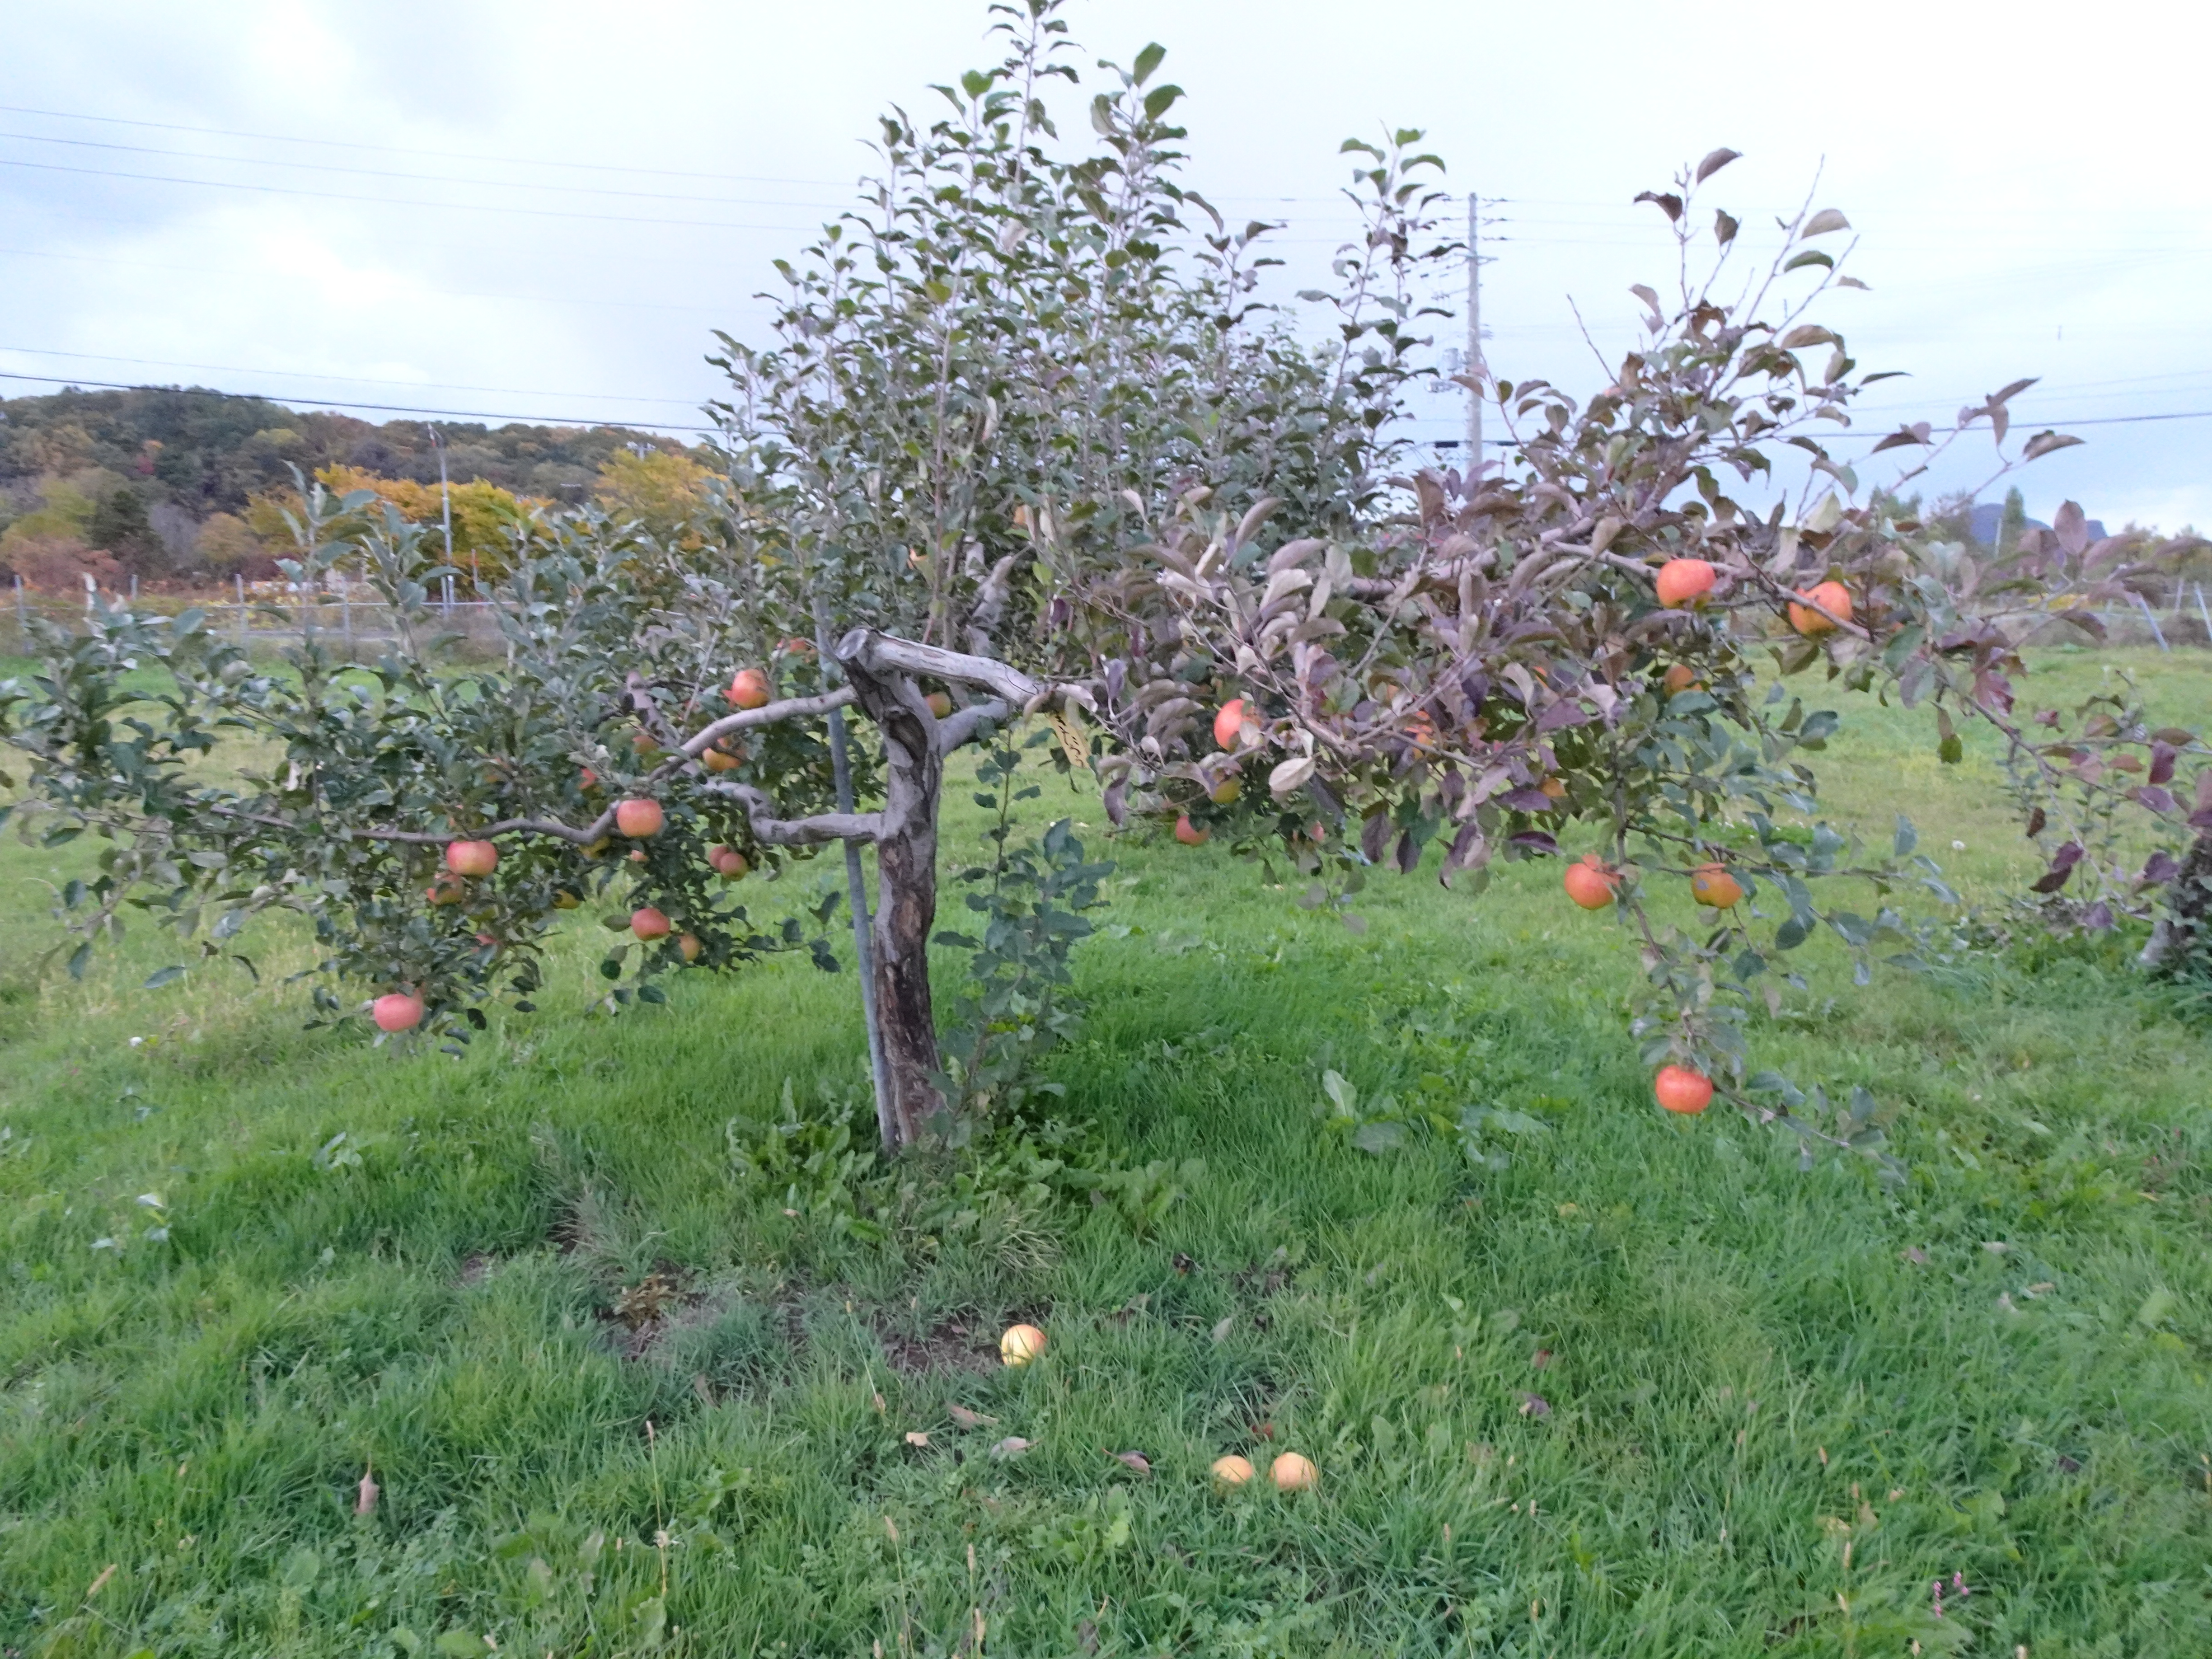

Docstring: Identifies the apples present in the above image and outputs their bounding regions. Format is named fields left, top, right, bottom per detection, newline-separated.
left=623, top=733, right=663, bottom=766
left=918, top=688, right=955, bottom=719
left=631, top=846, right=649, bottom=865
left=445, top=838, right=498, bottom=877
left=1005, top=503, right=1035, bottom=534
left=1662, top=662, right=1712, bottom=707
left=1292, top=816, right=1323, bottom=848
left=905, top=541, right=934, bottom=572
left=424, top=870, right=466, bottom=905
left=770, top=635, right=821, bottom=676
left=808, top=750, right=836, bottom=783
left=1526, top=774, right=1567, bottom=812
left=471, top=931, right=508, bottom=962
left=1203, top=766, right=1241, bottom=805
left=700, top=731, right=749, bottom=779
left=707, top=842, right=732, bottom=871
left=1178, top=810, right=1214, bottom=846
left=721, top=662, right=774, bottom=708
left=374, top=992, right=423, bottom=1032
left=1167, top=640, right=1191, bottom=662
left=574, top=768, right=607, bottom=794
left=1212, top=696, right=1273, bottom=757
left=547, top=876, right=581, bottom=910
left=1655, top=1062, right=1715, bottom=1117
left=486, top=754, right=517, bottom=787
left=631, top=906, right=671, bottom=942
left=449, top=802, right=480, bottom=834
left=1690, top=861, right=1745, bottom=910
left=616, top=797, right=665, bottom=839
left=576, top=820, right=613, bottom=864
left=1157, top=518, right=1205, bottom=571
left=1520, top=663, right=1553, bottom=693
left=665, top=928, right=702, bottom=962
left=1400, top=708, right=1450, bottom=762
left=1385, top=680, right=1411, bottom=706
left=674, top=701, right=711, bottom=733
left=1789, top=575, right=1856, bottom=638
left=1562, top=851, right=1627, bottom=915
left=1493, top=732, right=1520, bottom=760
left=721, top=851, right=749, bottom=885
left=1653, top=556, right=1721, bottom=616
